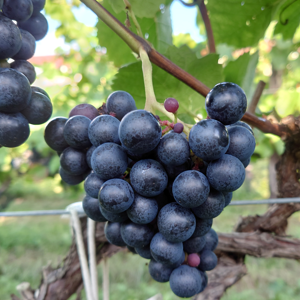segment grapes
<instances>
[{
  "label": "grapes",
  "mask_w": 300,
  "mask_h": 300,
  "mask_svg": "<svg viewBox=\"0 0 300 300\" xmlns=\"http://www.w3.org/2000/svg\"><path fill=\"white\" fill-rule=\"evenodd\" d=\"M246 109L245 90L221 82L206 96L208 118L189 136H162L158 118L117 90L98 109L81 103L52 118L44 139L60 157L62 181H84L83 211L105 223L107 241L150 259L153 280L191 298L218 263L213 219L242 185L256 148Z\"/></svg>",
  "instance_id": "1"
}]
</instances>
